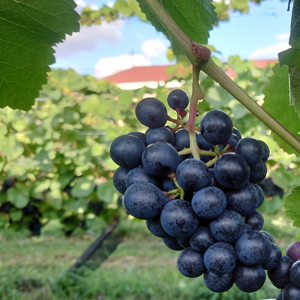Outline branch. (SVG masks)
<instances>
[{
	"label": "branch",
	"instance_id": "branch-1",
	"mask_svg": "<svg viewBox=\"0 0 300 300\" xmlns=\"http://www.w3.org/2000/svg\"><path fill=\"white\" fill-rule=\"evenodd\" d=\"M144 3L168 31V34L180 49L186 54L193 66H197L205 74L215 80L249 112L300 154V140L273 116L260 107V105L256 103L237 83H234L214 63L211 59V52L206 46L193 42L179 27H177L157 0H144Z\"/></svg>",
	"mask_w": 300,
	"mask_h": 300
}]
</instances>
